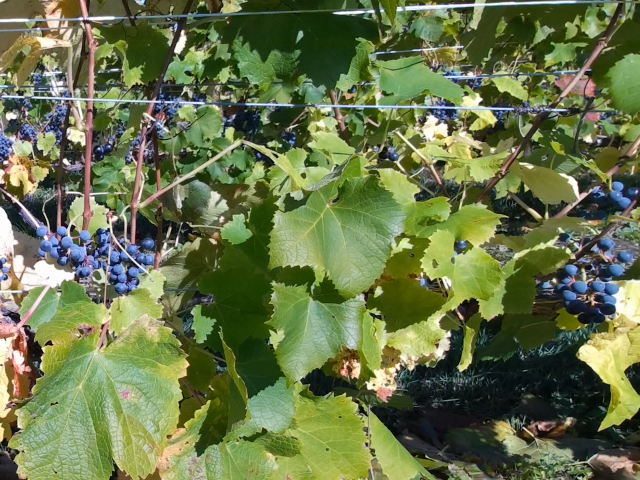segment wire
<instances>
[{
    "mask_svg": "<svg viewBox=\"0 0 640 480\" xmlns=\"http://www.w3.org/2000/svg\"><path fill=\"white\" fill-rule=\"evenodd\" d=\"M337 14H358V15H375V10L360 9H335V10H254L244 12L229 11H213L204 13L191 14H174V13H155V14H139V15H108L93 17H74V18H0V23L23 24V23H76V22H96L111 20H141V19H193L207 18L215 16L227 17H246L256 15H337Z\"/></svg>",
    "mask_w": 640,
    "mask_h": 480,
    "instance_id": "a73af890",
    "label": "wire"
},
{
    "mask_svg": "<svg viewBox=\"0 0 640 480\" xmlns=\"http://www.w3.org/2000/svg\"><path fill=\"white\" fill-rule=\"evenodd\" d=\"M607 0H512L500 3L483 2L477 4L468 3H425L418 5H410L406 7L407 11L421 9H450V8H466V9H497L514 5H537L539 3H606Z\"/></svg>",
    "mask_w": 640,
    "mask_h": 480,
    "instance_id": "4f2155b8",
    "label": "wire"
},
{
    "mask_svg": "<svg viewBox=\"0 0 640 480\" xmlns=\"http://www.w3.org/2000/svg\"><path fill=\"white\" fill-rule=\"evenodd\" d=\"M1 100H25V99H37V100H46L52 102H85V103H98V104H145V105H156L163 104L168 106H204L209 108H224V107H236V108H246V107H257V106H266L271 108H280V109H296V108H309V107H318V108H329L336 110H425V109H446V110H460V111H472V112H522V113H613L616 114L617 110L615 108H556V107H545V108H525V107H510V106H501V107H474V106H463V105H449V104H422V105H361V104H352V105H339V104H331V103H320V102H306V103H295V104H282V103H273L269 101H254V102H221V103H211L206 101H171L165 99H118V98H109V99H100V98H88L84 96L78 97H54L48 95H40V94H22V95H1Z\"/></svg>",
    "mask_w": 640,
    "mask_h": 480,
    "instance_id": "d2f4af69",
    "label": "wire"
}]
</instances>
